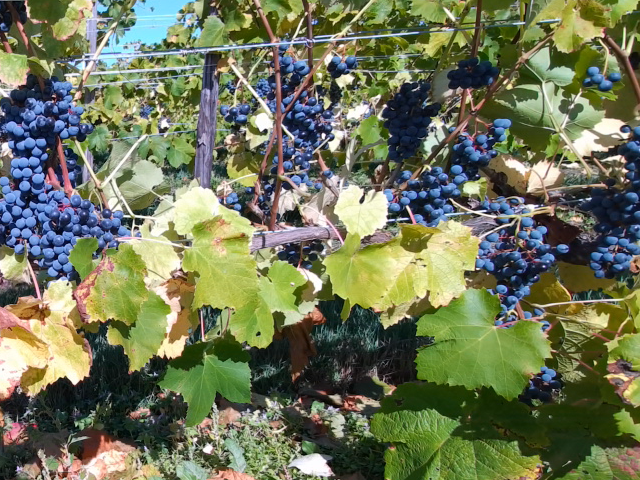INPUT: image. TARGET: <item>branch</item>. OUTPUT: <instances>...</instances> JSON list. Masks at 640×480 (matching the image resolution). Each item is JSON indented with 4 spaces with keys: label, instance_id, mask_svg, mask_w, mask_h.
<instances>
[{
    "label": "branch",
    "instance_id": "obj_13",
    "mask_svg": "<svg viewBox=\"0 0 640 480\" xmlns=\"http://www.w3.org/2000/svg\"><path fill=\"white\" fill-rule=\"evenodd\" d=\"M480 33H481V30L475 31L474 39L471 44V50L469 51L470 57H475L477 55L479 44H480Z\"/></svg>",
    "mask_w": 640,
    "mask_h": 480
},
{
    "label": "branch",
    "instance_id": "obj_14",
    "mask_svg": "<svg viewBox=\"0 0 640 480\" xmlns=\"http://www.w3.org/2000/svg\"><path fill=\"white\" fill-rule=\"evenodd\" d=\"M314 158L317 161V165L320 168L321 171H324L327 169V165L325 164V162L323 161V156L321 154V149L317 148L314 152Z\"/></svg>",
    "mask_w": 640,
    "mask_h": 480
},
{
    "label": "branch",
    "instance_id": "obj_11",
    "mask_svg": "<svg viewBox=\"0 0 640 480\" xmlns=\"http://www.w3.org/2000/svg\"><path fill=\"white\" fill-rule=\"evenodd\" d=\"M253 5L257 9V12L259 14V18L262 21V23H263V25H264V27L266 29V34L270 38V42H272V41H280V39L276 38V36L272 33L271 27H270L266 17L264 16L263 9H262L261 5L258 3V0H253Z\"/></svg>",
    "mask_w": 640,
    "mask_h": 480
},
{
    "label": "branch",
    "instance_id": "obj_2",
    "mask_svg": "<svg viewBox=\"0 0 640 480\" xmlns=\"http://www.w3.org/2000/svg\"><path fill=\"white\" fill-rule=\"evenodd\" d=\"M551 39H552L551 35L545 36L542 40L536 43L527 52L523 53L519 58H517L516 61L508 68V70H506L505 73L500 77V79L496 83H494L493 86L490 88V90L482 97V99L475 106V108L468 113L467 117L464 120H463V116H464V111L467 103L468 90L467 89L463 90L461 105L458 113L456 130L450 133V135L433 152V154L427 160H425L421 165L418 166V168L411 175L412 180H415L419 176L420 172L438 157V155L442 152V150L452 141V139L455 138V136L460 132V130H462L471 121L472 117L484 106L485 102L489 99V97L494 94L495 90L505 81V79L508 78V76L519 66V64L522 63L527 57H530L535 51H537L542 45H544Z\"/></svg>",
    "mask_w": 640,
    "mask_h": 480
},
{
    "label": "branch",
    "instance_id": "obj_12",
    "mask_svg": "<svg viewBox=\"0 0 640 480\" xmlns=\"http://www.w3.org/2000/svg\"><path fill=\"white\" fill-rule=\"evenodd\" d=\"M94 66H95V62H94V61H91V62L87 65V67L85 68L84 72L82 73V76H81V79H80L79 85H78V87H77V90L75 91V93H74V95H73V103H74V104H77V103H78V98H79V95H80V94H81V92H82V89H83L84 85H85L86 78H87V76H88L89 72L91 71V69H92Z\"/></svg>",
    "mask_w": 640,
    "mask_h": 480
},
{
    "label": "branch",
    "instance_id": "obj_1",
    "mask_svg": "<svg viewBox=\"0 0 640 480\" xmlns=\"http://www.w3.org/2000/svg\"><path fill=\"white\" fill-rule=\"evenodd\" d=\"M335 46H336L335 42L330 43L327 46V48L324 49V51L320 55L318 61L313 65V44L309 43L307 45L308 65L311 66V70L305 76L303 82L296 88V90L293 93L291 99L289 100V102L287 103V105L284 107L283 110H282V106H281L282 87H281V69H280L279 50H278L277 46L272 47V50H273V53H274L275 72H276V90H277V95H276V108H277V110H276V113H277V121L275 122L274 126L272 127L270 139H269V141L266 144V147L264 149L263 156H262L261 163H260V169L258 171L257 178H256L254 194L252 195V198L250 200L251 204H255L256 201H257V198L259 196L262 176H263L264 171L266 170V161H267L269 152L271 150V147H272V145H273V143H274V141L276 139V133H277L278 175L275 176L277 187H276V192H275V196H274L273 208H272V212H271V227H270V230L276 229V215H277V210H278V204H279V198H280V194H281V189H282V185L284 183L283 157H282V152H283V143H282L283 120L286 117V115L289 112V110L291 109V107L293 106V104L295 103V101L297 100L300 92L306 86L308 88V96L312 97L314 95V84H315L314 74L316 73V70L320 67V65L323 63V61L326 58L327 54Z\"/></svg>",
    "mask_w": 640,
    "mask_h": 480
},
{
    "label": "branch",
    "instance_id": "obj_9",
    "mask_svg": "<svg viewBox=\"0 0 640 480\" xmlns=\"http://www.w3.org/2000/svg\"><path fill=\"white\" fill-rule=\"evenodd\" d=\"M375 3V0H369L367 2V4L364 6L363 9H361L360 11H358L344 26L343 28L340 30V32L337 34V37H343L344 34L346 33V31L354 24V22H356L361 16H363L370 8L371 6Z\"/></svg>",
    "mask_w": 640,
    "mask_h": 480
},
{
    "label": "branch",
    "instance_id": "obj_10",
    "mask_svg": "<svg viewBox=\"0 0 640 480\" xmlns=\"http://www.w3.org/2000/svg\"><path fill=\"white\" fill-rule=\"evenodd\" d=\"M302 2L305 7L304 25H305L306 36L308 38H311L313 36V28H312V22H311L312 4L310 0H302Z\"/></svg>",
    "mask_w": 640,
    "mask_h": 480
},
{
    "label": "branch",
    "instance_id": "obj_6",
    "mask_svg": "<svg viewBox=\"0 0 640 480\" xmlns=\"http://www.w3.org/2000/svg\"><path fill=\"white\" fill-rule=\"evenodd\" d=\"M128 8V3L124 2L123 6L121 7L120 11L118 12L116 18L113 20V22L111 23L107 34L105 35V37L103 38L101 44L98 46V48L93 52V56L97 57L105 48V46L107 45V42L109 41L110 37L112 36L116 25L119 23V21L121 20L122 16L124 15L126 9Z\"/></svg>",
    "mask_w": 640,
    "mask_h": 480
},
{
    "label": "branch",
    "instance_id": "obj_7",
    "mask_svg": "<svg viewBox=\"0 0 640 480\" xmlns=\"http://www.w3.org/2000/svg\"><path fill=\"white\" fill-rule=\"evenodd\" d=\"M450 202H452L454 205H456L457 207H459L460 209L464 210V211H469L470 214H473L475 216L478 217H482V218H492V219H501V218H522V217H526V216H538L540 214H544L546 212L547 209H544L542 211H538L535 213H524V214H519V215H498V216H490V215H484V214H479L478 212H475L469 208H466L465 206L461 205L459 202L455 201V199H450Z\"/></svg>",
    "mask_w": 640,
    "mask_h": 480
},
{
    "label": "branch",
    "instance_id": "obj_15",
    "mask_svg": "<svg viewBox=\"0 0 640 480\" xmlns=\"http://www.w3.org/2000/svg\"><path fill=\"white\" fill-rule=\"evenodd\" d=\"M0 40H1L2 44L5 46V51L8 52V53H11L12 52V47L9 44V42L6 40L3 31H0Z\"/></svg>",
    "mask_w": 640,
    "mask_h": 480
},
{
    "label": "branch",
    "instance_id": "obj_4",
    "mask_svg": "<svg viewBox=\"0 0 640 480\" xmlns=\"http://www.w3.org/2000/svg\"><path fill=\"white\" fill-rule=\"evenodd\" d=\"M602 39L607 42L614 50V52L622 59L626 67V73L632 87L634 88L635 100L640 103V84L634 74L632 62L625 51H623L618 43L608 34H604Z\"/></svg>",
    "mask_w": 640,
    "mask_h": 480
},
{
    "label": "branch",
    "instance_id": "obj_5",
    "mask_svg": "<svg viewBox=\"0 0 640 480\" xmlns=\"http://www.w3.org/2000/svg\"><path fill=\"white\" fill-rule=\"evenodd\" d=\"M72 144H73L74 149H75V150H76V152L78 153V155H79L80 159L82 160V162L84 163V165H85V166H86V168L88 169V174H89L90 179L92 180V182L94 183V185H95L96 187H99L98 194H99L100 199L102 200V207H103L104 209H108V208H109V205L107 204V201H106V197H105V195H104L103 188H102V186H101L100 182L97 180V178H96V176H95V174H94V172H93V167L91 166L90 162H89V161H88V159L85 157V155H84V153H83V151H82L81 147L79 146V144H78V142H77V138H76V137H73V138H72Z\"/></svg>",
    "mask_w": 640,
    "mask_h": 480
},
{
    "label": "branch",
    "instance_id": "obj_3",
    "mask_svg": "<svg viewBox=\"0 0 640 480\" xmlns=\"http://www.w3.org/2000/svg\"><path fill=\"white\" fill-rule=\"evenodd\" d=\"M57 153H58L59 162L61 164V170L63 172V177L65 179V188L62 185H60L58 183V181L56 180V178L54 176L53 168L51 167V162L50 161L46 162V170H47L46 181L48 183H52L59 191H61V192L65 191L66 196L70 197L71 196V191H72V184L70 183V177L68 175L66 162H65V159H64L63 151H62V139L61 138L57 139Z\"/></svg>",
    "mask_w": 640,
    "mask_h": 480
},
{
    "label": "branch",
    "instance_id": "obj_8",
    "mask_svg": "<svg viewBox=\"0 0 640 480\" xmlns=\"http://www.w3.org/2000/svg\"><path fill=\"white\" fill-rule=\"evenodd\" d=\"M7 7L9 9L10 14L13 16V22L14 24L17 26L20 38L22 39V41L24 42V45L26 46V50L29 53L33 52V49L31 48V43L29 42V35L28 33L25 31L24 26L22 25V23L19 21L18 19V13L17 11L14 9L13 4L12 3H8Z\"/></svg>",
    "mask_w": 640,
    "mask_h": 480
}]
</instances>
